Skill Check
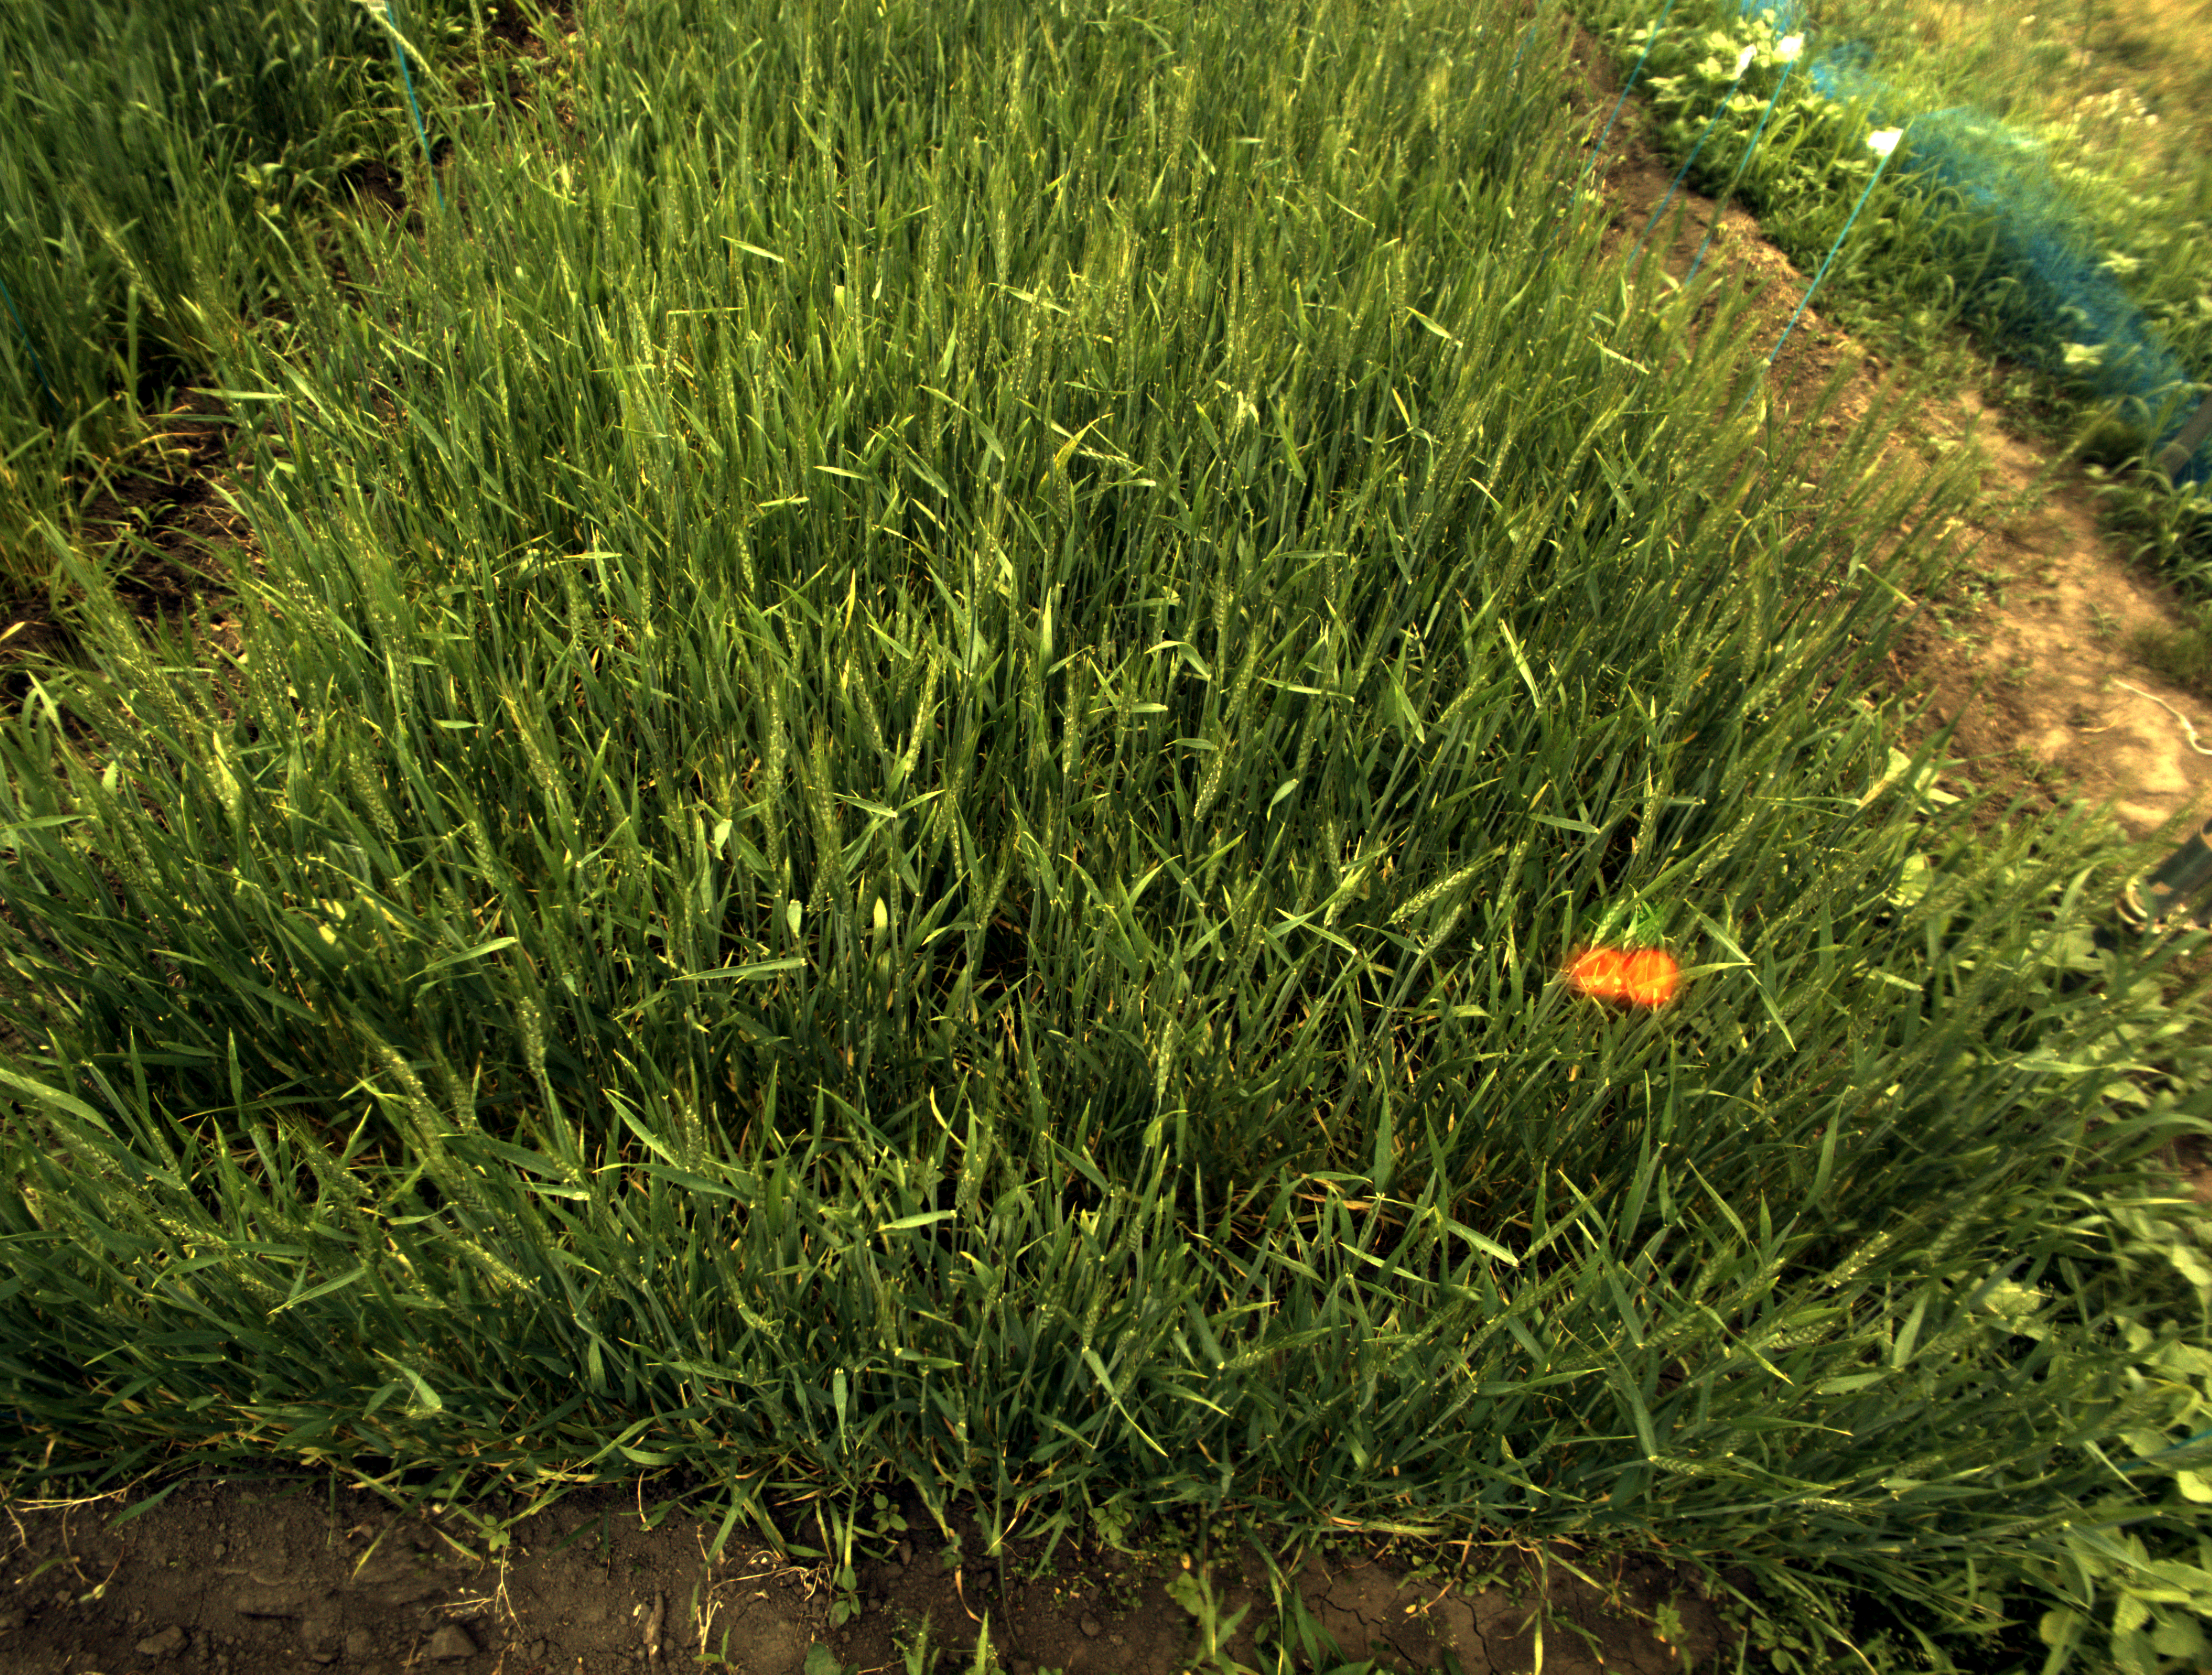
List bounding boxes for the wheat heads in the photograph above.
[964,96,970,135]
[96,789,166,890]
[107,848,155,898]
[1840,1074,1884,1099]
[904,684,934,775]
[975,537,998,608]
[766,686,787,804]
[1839,450,1905,511]
[987,310,995,330]
[1108,269,1133,351]
[758,453,770,490]
[1671,629,1703,700]
[1555,1352,1600,1374]
[1063,684,1076,773]
[441,886,467,922]
[1016,110,1033,154]
[1402,84,1436,163]
[844,565,850,598]
[1647,1453,1704,1478]
[1893,1455,1943,1483]
[1847,472,1905,542]
[781,604,798,669]
[1325,549,1336,602]
[1349,6,1357,28]
[101,230,166,318]
[1368,309,1390,360]
[692,66,716,118]
[7,1261,34,1288]
[1430,81,1440,132]
[833,36,843,89]
[780,533,791,572]
[563,1115,578,1150]
[853,283,867,376]
[1829,415,1866,469]
[1113,1181,1122,1223]
[1300,213,1312,278]
[1921,1192,1989,1269]
[802,38,814,104]
[510,317,539,374]
[519,994,545,1079]
[995,1302,1005,1327]
[653,456,667,501]
[754,1172,767,1221]
[1590,895,1624,949]
[736,481,752,522]
[350,514,376,594]
[1351,385,1368,416]
[968,1125,993,1209]
[1535,51,1566,80]
[566,579,581,652]
[1170,1275,1178,1298]
[106,609,179,715]
[1768,1321,1833,1348]
[1765,413,1814,482]
[1424,489,1457,548]
[1675,466,1713,519]
[114,654,171,714]
[1363,1356,1378,1386]
[583,602,608,652]
[404,1398,448,1421]
[1171,94,1187,178]
[809,846,831,913]
[536,137,550,176]
[503,429,520,489]
[1359,1197,1379,1241]
[955,1387,968,1424]
[821,595,831,657]
[1139,144,1150,207]
[1099,40,1110,83]
[1039,1280,1065,1329]
[78,684,154,758]
[1219,188,1231,242]
[635,384,656,435]
[186,676,224,734]
[851,669,886,754]
[734,528,754,592]
[255,667,278,732]
[220,1195,236,1226]
[662,315,677,378]
[467,816,496,880]
[1845,991,1890,1037]
[1244,930,1261,977]
[1420,1220,1438,1265]
[1447,1312,1475,1348]
[927,215,940,281]
[1537,3,1561,46]
[741,91,755,155]
[975,883,985,922]
[398,133,415,206]
[928,302,945,356]
[892,609,907,662]
[1639,395,1664,447]
[1754,1079,1809,1124]
[1485,429,1517,490]
[1375,8,1396,70]
[1539,77,1564,126]
[1279,119,1293,170]
[1589,266,1615,318]
[143,1221,175,1257]
[360,1221,374,1260]
[620,304,637,338]
[1496,1030,1507,1054]
[2083,1000,2138,1046]
[1951,959,1989,1011]
[338,228,365,283]
[347,750,400,838]
[1274,9,1294,47]
[615,684,626,729]
[641,438,656,483]
[1217,649,1226,683]
[1224,287,1238,362]
[471,1,485,40]
[896,634,930,702]
[1505,71,1517,105]
[318,527,341,601]
[1101,946,1113,984]
[1138,498,1159,555]
[1420,430,1457,493]
[495,1204,528,1243]
[405,456,420,507]
[2058,852,2160,932]
[464,596,477,643]
[981,867,1004,922]
[917,159,930,184]
[2006,440,2079,517]
[1459,77,1483,127]
[983,330,995,373]
[813,197,827,249]
[956,305,968,392]
[549,754,576,819]
[1671,912,1696,958]
[448,1288,469,1322]
[1344,497,1366,553]
[660,1139,686,1168]
[258,1204,301,1235]
[1395,264,1407,337]
[1211,154,1225,185]
[879,1305,900,1348]
[1653,977,1684,1029]
[308,1145,334,1178]
[1753,470,1802,527]
[757,1361,766,1384]
[1167,196,1178,253]
[845,1120,876,1169]
[1472,1312,1508,1348]
[370,10,430,79]
[704,653,716,696]
[1019,686,1028,725]
[378,1045,426,1100]
[870,986,880,1058]
[1525,1209,1577,1259]
[970,163,980,200]
[1024,314,1033,367]
[1107,65,1114,109]
[1390,1326,1432,1363]
[1764,1020,1810,1064]
[837,878,853,925]
[852,1273,861,1305]
[1247,541,1255,573]
[641,570,650,625]
[1542,715,1565,767]
[1159,91,1168,160]
[1965,985,2017,1032]
[308,676,320,729]
[1115,1331,1138,1352]
[1689,1248,1731,1307]
[728,603,749,657]
[1021,172,1043,235]
[1241,245,1255,302]
[1468,6,1482,38]
[1075,444,1132,475]
[1509,0,1522,44]
[975,485,983,538]
[627,845,648,890]
[863,622,874,667]
[1219,920,1247,970]
[1817,1346,1854,1392]
[1346,307,1366,371]
[1225,377,1240,437]
[1561,425,1599,480]
[190,250,227,332]
[949,814,963,880]
[256,633,289,701]
[234,243,265,328]
[677,920,688,956]
[402,1348,434,1378]
[294,618,325,667]
[889,534,898,579]
[2142,808,2194,855]
[1809,864,1861,907]
[842,235,855,292]
[1058,467,1071,527]
[1300,38,1315,88]
[1572,207,1614,279]
[1173,617,1195,674]
[302,365,352,435]
[663,394,677,437]
[467,676,483,721]
[916,278,927,339]
[1160,261,1179,331]
[659,247,671,300]
[760,346,775,396]
[422,205,443,285]
[917,423,931,466]
[1355,636,1377,684]
[1314,145,1325,203]
[713,466,726,507]
[1106,1241,1121,1262]
[1090,281,1115,340]
[1739,654,1804,717]
[213,340,254,393]
[408,1092,443,1154]
[1417,300,1442,358]
[354,219,378,266]
[806,627,816,670]
[969,303,979,367]
[1009,573,1018,637]
[601,1271,623,1301]
[995,206,1007,301]
[1874,1284,1927,1325]
[1226,1347,1274,1369]
[984,636,998,677]
[1373,695,1386,732]
[1351,85,1362,123]
[1450,303,1478,381]
[1695,301,1732,374]
[1894,463,1942,519]
[579,449,593,500]
[1310,1399,1334,1421]
[1191,430,1207,476]
[1183,286,1194,355]
[908,1139,916,1183]
[1062,274,1090,351]
[1693,811,1755,884]
[688,181,703,238]
[1149,416,1162,481]
[1628,254,1655,356]
[644,245,653,297]
[1010,329,1023,396]
[1127,677,1140,721]
[1187,170,1200,222]
[2026,841,2079,904]
[1549,1291,1585,1326]
[775,119,788,174]
[552,238,572,289]
[1438,672,1488,725]
[452,1238,535,1295]
[729,194,735,227]
[1505,512,1549,599]
[814,768,832,832]
[385,609,413,703]
[1700,320,1761,391]
[1069,130,1086,172]
[1431,1299,1460,1325]
[549,924,567,976]
[148,1125,182,1176]
[1638,776,1665,848]
[198,738,235,813]
[1081,1301,1099,1348]
[1556,516,1585,580]
[495,347,511,414]
[1179,936,1194,964]
[1903,516,1965,592]
[1532,649,1575,719]
[1379,122,1393,160]
[1675,987,1703,1027]
[1567,9,1580,49]
[383,441,399,494]
[1301,864,1316,907]
[1813,462,1853,543]
[952,184,961,228]
[714,371,726,429]
[68,766,106,829]
[1308,320,1330,374]
[1044,430,1053,471]
[864,501,872,555]
[636,301,657,365]
[924,1154,936,1199]
[1193,760,1223,821]
[604,177,617,201]
[857,876,871,927]
[57,1215,101,1255]
[1753,914,1787,956]
[316,277,336,346]
[763,799,778,872]
[1438,427,1474,494]
[1203,158,1211,195]
[438,193,465,295]
[1524,1034,1553,1064]
[1041,305,1050,386]
[27,749,78,811]
[1073,147,1091,216]
[895,443,903,485]
[809,801,826,860]
[1599,741,1619,789]
[1619,922,1652,965]
[1674,1324,1708,1352]
[286,561,339,646]
[228,403,259,453]
[684,1103,704,1172]
[1137,77,1148,135]
[420,450,435,498]
[520,727,554,792]
[958,69,969,131]
[1006,53,1025,126]
[911,614,919,654]
[821,136,832,175]
[1721,731,1768,798]
[875,226,889,289]
[1440,104,1448,145]
[1593,1048,1612,1096]
[193,589,212,650]
[1318,335,1337,377]
[1596,1168,1650,1230]
[699,1356,745,1380]
[1902,867,1987,931]
[1682,436,1718,475]
[1592,509,1624,571]
[777,447,792,492]
[1036,1129,1048,1177]
[1775,977,1822,1025]
[636,438,644,473]
[530,1216,557,1250]
[311,250,343,314]
[1457,1377,1478,1405]
[466,491,480,541]
[1488,1005,1509,1034]
[930,396,940,450]
[1152,602,1162,646]
[471,428,484,468]
[881,24,891,62]
[1789,875,1830,923]
[1863,494,1904,560]
[1005,1151,1021,1189]
[251,1121,276,1170]
[1441,386,1465,440]
[395,78,424,149]
[1118,1371,1133,1396]
[823,536,834,576]
[1088,459,1107,519]
[733,271,749,309]
[588,1182,609,1221]
[1743,1257,1784,1301]
[668,852,686,898]
[1438,14,1452,49]
[1046,523,1055,572]
[1739,587,1760,683]
[531,453,547,502]
[745,1307,776,1337]
[1047,32,1055,65]
[431,642,450,677]
[1967,871,2034,937]
[239,1271,285,1304]
[1416,655,1434,709]
[684,885,692,934]
[340,1170,374,1200]
[1640,1312,1695,1349]
[1204,835,1221,893]
[1495,839,1527,909]
[1419,902,1460,963]
[840,1184,853,1213]
[1099,621,1110,672]
[1215,566,1226,629]
[1054,52,1063,102]
[992,51,1003,117]
[1699,594,1746,647]
[330,1184,364,1233]
[1905,1079,1947,1117]
[1338,16,1348,52]
[1033,737,1042,775]
[1561,295,1595,364]
[1083,0,1092,15]
[1332,872,1361,918]
[931,766,964,840]
[446,1070,475,1136]
[432,1153,490,1213]
[544,1146,579,1185]
[1435,317,1464,378]
[840,1351,857,1373]
[1502,177,1537,248]
[985,1281,999,1312]
[1130,984,1139,1008]
[1922,1324,1984,1358]
[1464,296,1493,370]
[664,895,675,933]
[728,248,734,288]
[92,1305,129,1327]
[1325,818,1343,887]
[747,664,768,703]
[952,405,961,442]
[1127,1212,1141,1252]
[1335,329,1347,377]
[280,275,316,337]
[1388,866,1475,925]
[667,508,675,541]
[1238,368,1260,429]
[1252,112,1275,172]
[1797,1495,1852,1517]
[1331,123,1347,187]
[614,794,626,845]
[1721,1430,1746,1457]
[959,573,971,634]
[1766,712,1790,768]
[1116,139,1135,180]
[666,180,682,241]
[777,269,786,312]
[1320,647,1337,713]
[1185,378,1202,427]
[1382,47,1397,94]
[1117,689,1125,735]
[797,430,809,477]
[1001,394,1019,442]
[474,221,484,265]
[1226,654,1253,720]
[887,866,901,915]
[1043,825,1053,860]
[159,1217,230,1250]
[954,1167,973,1207]
[724,1265,744,1307]
[602,204,615,237]
[615,1255,644,1293]
[665,800,691,857]
[1746,1313,1782,1349]
[848,139,868,226]
[1230,872,1244,925]
[674,428,686,488]
[50,1117,123,1178]
[1857,385,1917,470]
[1327,721,1339,751]
[598,473,614,523]
[472,395,481,434]
[1510,1282,1554,1316]
[602,242,615,288]
[1019,630,1026,669]
[1028,645,1038,676]
[942,626,951,669]
[1156,1018,1172,1096]
[562,886,575,915]
[967,397,978,448]
[1298,712,1317,765]
[665,628,674,679]
[1824,1233,1890,1290]
[721,354,736,411]
[479,273,495,311]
